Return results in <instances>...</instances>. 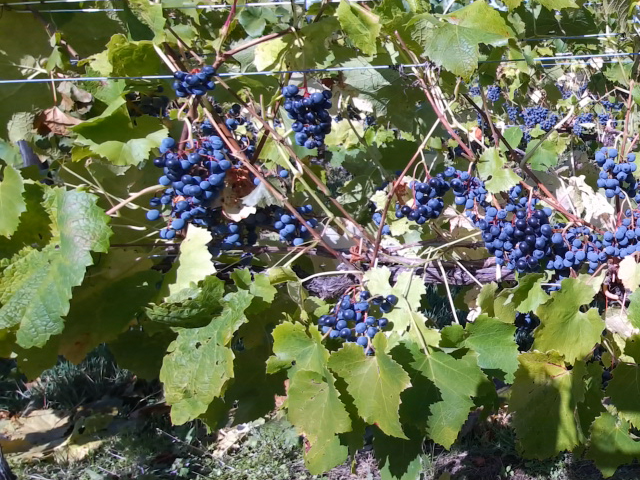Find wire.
I'll use <instances>...</instances> for the list:
<instances>
[{
	"instance_id": "3",
	"label": "wire",
	"mask_w": 640,
	"mask_h": 480,
	"mask_svg": "<svg viewBox=\"0 0 640 480\" xmlns=\"http://www.w3.org/2000/svg\"><path fill=\"white\" fill-rule=\"evenodd\" d=\"M634 56L640 57V52L636 51H621V52H603V53H582L576 55H553L545 57H534V62H547L555 60H578L584 58H605V57H623Z\"/></svg>"
},
{
	"instance_id": "2",
	"label": "wire",
	"mask_w": 640,
	"mask_h": 480,
	"mask_svg": "<svg viewBox=\"0 0 640 480\" xmlns=\"http://www.w3.org/2000/svg\"><path fill=\"white\" fill-rule=\"evenodd\" d=\"M172 74L166 75H141V76H85V77H54V78H17L0 79V84L20 83H56V82H88V81H143V80H168Z\"/></svg>"
},
{
	"instance_id": "1",
	"label": "wire",
	"mask_w": 640,
	"mask_h": 480,
	"mask_svg": "<svg viewBox=\"0 0 640 480\" xmlns=\"http://www.w3.org/2000/svg\"><path fill=\"white\" fill-rule=\"evenodd\" d=\"M434 62L428 63H388L377 66H347V67H317L299 70H262V71H240L226 72L217 71L216 75L224 77L242 76H264V75H302L320 72H350V71H379L390 68H430L434 67Z\"/></svg>"
}]
</instances>
